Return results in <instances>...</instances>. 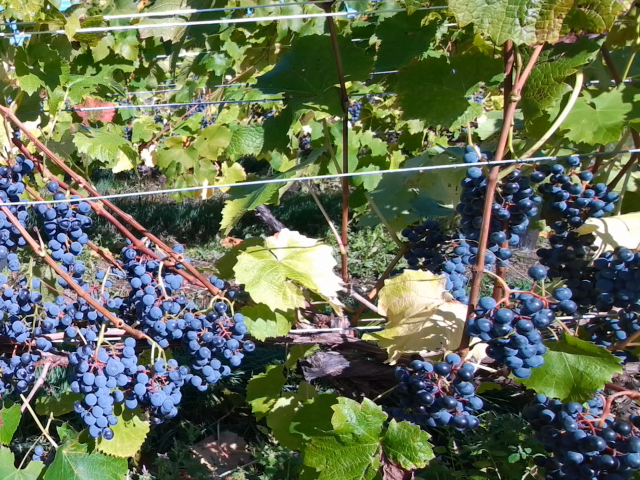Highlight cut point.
<instances>
[{
	"mask_svg": "<svg viewBox=\"0 0 640 480\" xmlns=\"http://www.w3.org/2000/svg\"><path fill=\"white\" fill-rule=\"evenodd\" d=\"M627 396H628V393L626 391L613 392L611 396L608 398V400L606 401V405H605V408L603 409V412L605 414H609L612 410L613 404L616 401V399H624Z\"/></svg>",
	"mask_w": 640,
	"mask_h": 480,
	"instance_id": "1",
	"label": "cut point"
},
{
	"mask_svg": "<svg viewBox=\"0 0 640 480\" xmlns=\"http://www.w3.org/2000/svg\"><path fill=\"white\" fill-rule=\"evenodd\" d=\"M484 274L494 278L495 280H497V282H499L503 286L504 290H508L510 288V285L508 284V282L507 281H503L502 278L498 274L495 273V270L490 269V268H485L484 269Z\"/></svg>",
	"mask_w": 640,
	"mask_h": 480,
	"instance_id": "2",
	"label": "cut point"
},
{
	"mask_svg": "<svg viewBox=\"0 0 640 480\" xmlns=\"http://www.w3.org/2000/svg\"><path fill=\"white\" fill-rule=\"evenodd\" d=\"M217 301H224L227 305H229V304L231 303V300H230L227 296L222 295V294L220 293V295H219L218 297H215V296L213 295V296L211 297V299L207 302V306H208L209 308H212V307L217 303Z\"/></svg>",
	"mask_w": 640,
	"mask_h": 480,
	"instance_id": "3",
	"label": "cut point"
}]
</instances>
